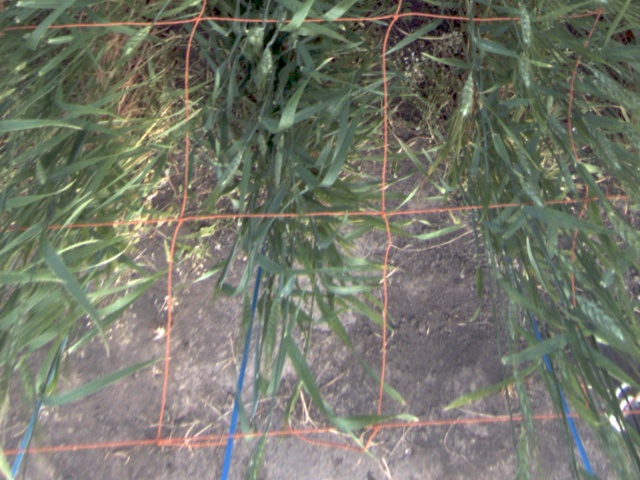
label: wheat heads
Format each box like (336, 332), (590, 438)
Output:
(593, 72), (637, 108)
(610, 430), (633, 471)
(520, 6), (534, 45)
(518, 437), (529, 480)
(517, 179), (543, 208)
(506, 298), (514, 341)
(511, 138), (531, 173)
(596, 130), (622, 174)
(246, 27), (261, 47)
(458, 76), (476, 112)
(517, 53), (536, 89)
(35, 157), (48, 185)
(513, 370), (534, 432)
(262, 48), (274, 70)
(548, 343), (568, 376)
(608, 213), (640, 253)
(577, 298), (625, 341)
(119, 27), (150, 55)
